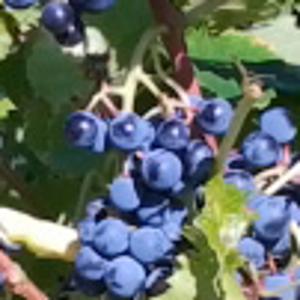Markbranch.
<instances>
[{
	"mask_svg": "<svg viewBox=\"0 0 300 300\" xmlns=\"http://www.w3.org/2000/svg\"><path fill=\"white\" fill-rule=\"evenodd\" d=\"M148 5L153 9L157 29L165 37L170 66L178 79L179 90L191 97L199 96L201 87L191 62L180 13L169 0H148Z\"/></svg>",
	"mask_w": 300,
	"mask_h": 300,
	"instance_id": "30e6481e",
	"label": "branch"
},
{
	"mask_svg": "<svg viewBox=\"0 0 300 300\" xmlns=\"http://www.w3.org/2000/svg\"><path fill=\"white\" fill-rule=\"evenodd\" d=\"M0 281L20 300H52L51 295L43 293L32 277L3 250H0Z\"/></svg>",
	"mask_w": 300,
	"mask_h": 300,
	"instance_id": "325d2c04",
	"label": "branch"
}]
</instances>
